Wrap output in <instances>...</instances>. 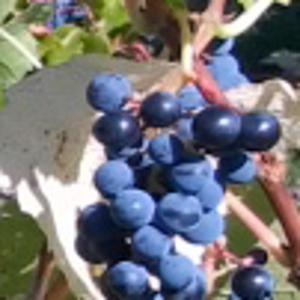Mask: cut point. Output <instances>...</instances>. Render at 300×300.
<instances>
[{"label":"cut point","mask_w":300,"mask_h":300,"mask_svg":"<svg viewBox=\"0 0 300 300\" xmlns=\"http://www.w3.org/2000/svg\"><path fill=\"white\" fill-rule=\"evenodd\" d=\"M171 13L178 16L179 36L181 41L182 68L189 70L191 68V32L188 20L187 10L180 6H173Z\"/></svg>","instance_id":"cut-point-1"}]
</instances>
